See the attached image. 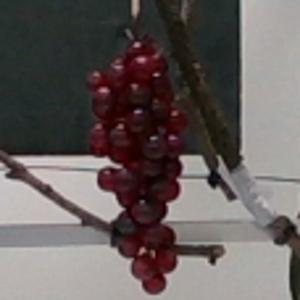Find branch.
Segmentation results:
<instances>
[{"instance_id": "obj_1", "label": "branch", "mask_w": 300, "mask_h": 300, "mask_svg": "<svg viewBox=\"0 0 300 300\" xmlns=\"http://www.w3.org/2000/svg\"><path fill=\"white\" fill-rule=\"evenodd\" d=\"M203 0H154L168 30L175 69L190 92L197 149L209 174L208 187L222 192L228 203L240 201L269 233L273 245L289 248L287 268L291 300H300V209L295 222L279 214L273 193L253 177L218 104L211 73L195 38V21Z\"/></svg>"}, {"instance_id": "obj_2", "label": "branch", "mask_w": 300, "mask_h": 300, "mask_svg": "<svg viewBox=\"0 0 300 300\" xmlns=\"http://www.w3.org/2000/svg\"><path fill=\"white\" fill-rule=\"evenodd\" d=\"M0 164L10 169L3 175L5 179L23 183L37 194L79 219L81 227H90L95 232L106 234L109 237L110 247L117 248V241L113 239L109 230L110 222L103 220L73 200L59 194L51 184L45 183L42 179L32 174L24 163L14 159L1 146Z\"/></svg>"}, {"instance_id": "obj_3", "label": "branch", "mask_w": 300, "mask_h": 300, "mask_svg": "<svg viewBox=\"0 0 300 300\" xmlns=\"http://www.w3.org/2000/svg\"><path fill=\"white\" fill-rule=\"evenodd\" d=\"M178 257L206 259L210 267H217V261L225 257L224 244H178L172 249Z\"/></svg>"}]
</instances>
